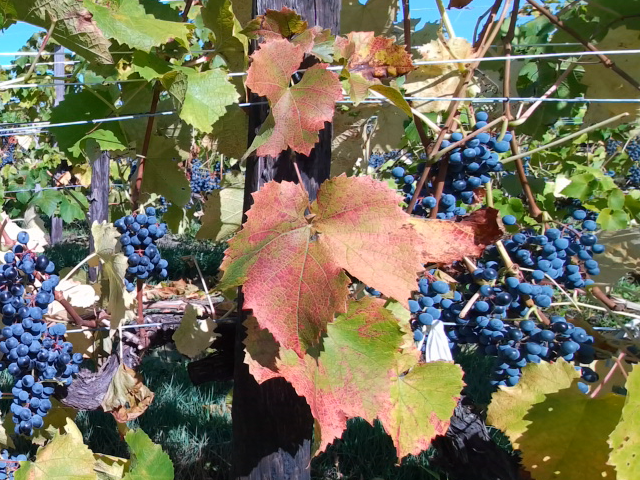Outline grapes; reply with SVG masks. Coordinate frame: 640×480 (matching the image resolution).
Wrapping results in <instances>:
<instances>
[{"label":"grapes","instance_id":"grapes-2","mask_svg":"<svg viewBox=\"0 0 640 480\" xmlns=\"http://www.w3.org/2000/svg\"><path fill=\"white\" fill-rule=\"evenodd\" d=\"M506 286L508 291L501 286L492 287L489 283L479 288V293L484 297L495 295V317L489 314L492 310L489 301H476L470 310L487 315L474 320L470 315L460 318L462 307L455 303L463 300V294L456 290L454 298H442V295L451 291V286L445 281L431 283L427 278L418 281V292L424 297L409 299L407 304L412 313L427 308L418 315V323L422 326H433L436 320L456 322L455 326L444 327L450 349H455L457 343H482L486 346L485 353L488 356L497 354L498 368L493 370L488 383L499 387L516 386L521 377V367H526L528 363H541L542 358H548L550 349L555 347V339L561 342L558 354L565 361H574L581 345H593L596 342V338L588 334L584 327L568 323L563 315L549 317L551 330L536 325L532 320H522L519 328L506 323L503 319L508 318V311L525 316L529 310L527 305L522 304L521 295L531 296L539 307H549L553 303L551 286L518 281L514 276L507 278ZM523 332H529L530 337L524 346L516 348L524 337Z\"/></svg>","mask_w":640,"mask_h":480},{"label":"grapes","instance_id":"grapes-6","mask_svg":"<svg viewBox=\"0 0 640 480\" xmlns=\"http://www.w3.org/2000/svg\"><path fill=\"white\" fill-rule=\"evenodd\" d=\"M392 176L394 177L395 183H400L401 178H403V182L405 185L403 186V192L405 193L404 202L408 203L411 198L415 186L413 183L415 182V177L413 175H406V169L403 166L395 165L392 170Z\"/></svg>","mask_w":640,"mask_h":480},{"label":"grapes","instance_id":"grapes-9","mask_svg":"<svg viewBox=\"0 0 640 480\" xmlns=\"http://www.w3.org/2000/svg\"><path fill=\"white\" fill-rule=\"evenodd\" d=\"M476 119H477V123H476L475 128L477 130H480V129H482L483 127H485L487 125V121L489 119V114L485 110H480L476 114Z\"/></svg>","mask_w":640,"mask_h":480},{"label":"grapes","instance_id":"grapes-10","mask_svg":"<svg viewBox=\"0 0 640 480\" xmlns=\"http://www.w3.org/2000/svg\"><path fill=\"white\" fill-rule=\"evenodd\" d=\"M463 139V134L461 132H453L449 139L443 140L440 149H444V147H450L455 142H460Z\"/></svg>","mask_w":640,"mask_h":480},{"label":"grapes","instance_id":"grapes-8","mask_svg":"<svg viewBox=\"0 0 640 480\" xmlns=\"http://www.w3.org/2000/svg\"><path fill=\"white\" fill-rule=\"evenodd\" d=\"M575 371H581V378L587 382H578L577 388L583 393L587 394L590 391V385L599 382V374L591 370L589 367L575 366Z\"/></svg>","mask_w":640,"mask_h":480},{"label":"grapes","instance_id":"grapes-7","mask_svg":"<svg viewBox=\"0 0 640 480\" xmlns=\"http://www.w3.org/2000/svg\"><path fill=\"white\" fill-rule=\"evenodd\" d=\"M500 273L499 263L497 261H487L477 263V270L473 272L475 279H485L486 281H496Z\"/></svg>","mask_w":640,"mask_h":480},{"label":"grapes","instance_id":"grapes-3","mask_svg":"<svg viewBox=\"0 0 640 480\" xmlns=\"http://www.w3.org/2000/svg\"><path fill=\"white\" fill-rule=\"evenodd\" d=\"M526 243L543 245L542 255H532L530 249H522ZM505 249L515 253L523 265L535 266L531 272L534 281H543L545 273L557 283L564 281L567 289L587 287L595 283L593 278H584L580 273V265H570L571 256H578L584 262L585 272L591 276H600V263L593 259L594 255H602L605 245L598 243L594 232L584 233L579 240L563 236L559 228H547L544 234H535L534 229L517 232L504 242Z\"/></svg>","mask_w":640,"mask_h":480},{"label":"grapes","instance_id":"grapes-4","mask_svg":"<svg viewBox=\"0 0 640 480\" xmlns=\"http://www.w3.org/2000/svg\"><path fill=\"white\" fill-rule=\"evenodd\" d=\"M512 140L510 131L504 133L501 141L488 132L478 133L449 153L448 172L438 200L437 219H452L456 215L467 214V209L457 207L456 201L462 200L465 205L475 202L472 189L491 181L489 171L501 172L504 169L498 153H506Z\"/></svg>","mask_w":640,"mask_h":480},{"label":"grapes","instance_id":"grapes-5","mask_svg":"<svg viewBox=\"0 0 640 480\" xmlns=\"http://www.w3.org/2000/svg\"><path fill=\"white\" fill-rule=\"evenodd\" d=\"M156 208L148 206L146 214L122 216L114 221V226L120 234V243L125 247V254L128 256L127 271L135 273L140 279H147L156 268H159V275H168V261L162 258L157 246L152 240L163 238L167 233V225L160 223L158 226Z\"/></svg>","mask_w":640,"mask_h":480},{"label":"grapes","instance_id":"grapes-1","mask_svg":"<svg viewBox=\"0 0 640 480\" xmlns=\"http://www.w3.org/2000/svg\"><path fill=\"white\" fill-rule=\"evenodd\" d=\"M17 241L20 244H14L12 252L4 254L5 265L0 266V284L7 285V289L0 293V301L5 304L1 317L4 325L2 336L7 338L0 342V351L4 353L0 371L8 370L16 376L17 382L11 389L13 401L10 403L14 432L32 436L34 428L41 429L44 426V417L53 407L49 397L55 392L53 385L44 387L35 382L32 369H35L39 380L54 378L63 386H70L73 373L80 370L83 355L71 354L73 344L64 337L67 327L63 323H55L47 328V323L40 321L48 312L49 304L55 301L54 289L60 283L58 274H51L48 280L41 283L34 296L35 307H32L30 299H23L25 287L16 282L19 277L17 270L27 274L28 282H33L35 269L53 273L56 264L45 255L35 260L30 253H25L21 261H15L16 254L23 252L22 245L30 242V234L20 231Z\"/></svg>","mask_w":640,"mask_h":480}]
</instances>
